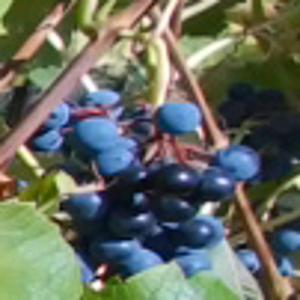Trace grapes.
<instances>
[{
  "mask_svg": "<svg viewBox=\"0 0 300 300\" xmlns=\"http://www.w3.org/2000/svg\"><path fill=\"white\" fill-rule=\"evenodd\" d=\"M78 103L57 104L30 147L62 153L72 124L78 161L93 157L98 178L119 180L106 192L72 195L61 204L78 231L72 246L81 282H94L96 262L111 266L120 280L172 262L186 280L207 272L226 230L217 216L200 212L205 203L226 202L236 182L257 181L266 170L263 154L238 143L214 151L180 144L174 135L193 134L201 125L191 103L129 107L110 88L83 93Z\"/></svg>",
  "mask_w": 300,
  "mask_h": 300,
  "instance_id": "obj_1",
  "label": "grapes"
},
{
  "mask_svg": "<svg viewBox=\"0 0 300 300\" xmlns=\"http://www.w3.org/2000/svg\"><path fill=\"white\" fill-rule=\"evenodd\" d=\"M268 244L276 252L274 257L279 274L290 276L295 264L289 255L300 254V231L292 227L279 228L269 234Z\"/></svg>",
  "mask_w": 300,
  "mask_h": 300,
  "instance_id": "obj_2",
  "label": "grapes"
},
{
  "mask_svg": "<svg viewBox=\"0 0 300 300\" xmlns=\"http://www.w3.org/2000/svg\"><path fill=\"white\" fill-rule=\"evenodd\" d=\"M237 257L248 272L255 273L259 270L261 258L254 249L242 247L238 250Z\"/></svg>",
  "mask_w": 300,
  "mask_h": 300,
  "instance_id": "obj_3",
  "label": "grapes"
}]
</instances>
